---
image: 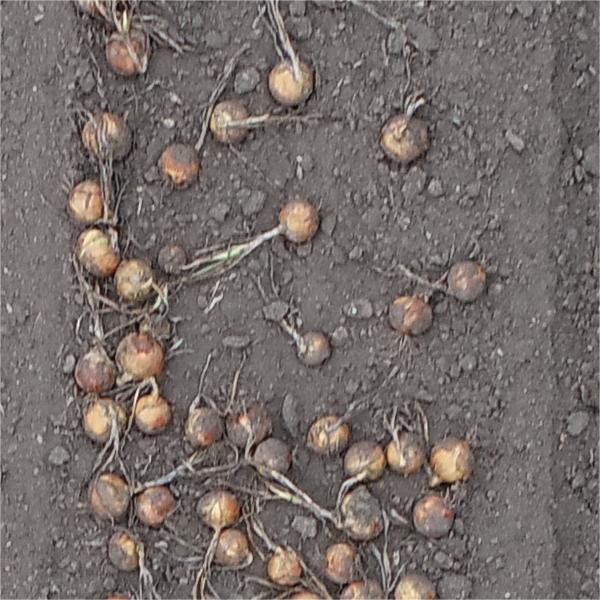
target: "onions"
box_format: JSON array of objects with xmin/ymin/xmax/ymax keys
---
[
  {"xmin": 66, "ymin": 182, "xmax": 103, "ymax": 221},
  {"xmin": 135, "ymin": 485, "xmax": 174, "ymax": 525},
  {"xmin": 155, "ymin": 142, "xmax": 199, "ymax": 187},
  {"xmin": 209, "ymin": 99, "xmax": 248, "ymax": 141},
  {"xmin": 335, "ymin": 578, "xmax": 378, "ymax": 599},
  {"xmin": 76, "ymin": 228, "xmax": 119, "ymax": 275},
  {"xmin": 114, "ymin": 258, "xmax": 153, "ymax": 300},
  {"xmin": 116, "ymin": 334, "xmax": 162, "ymax": 378},
  {"xmin": 81, "ymin": 113, "xmax": 127, "ymax": 157},
  {"xmin": 343, "ymin": 441, "xmax": 383, "ymax": 478},
  {"xmin": 156, "ymin": 241, "xmax": 185, "ymax": 270},
  {"xmin": 393, "ymin": 568, "xmax": 435, "ymax": 599},
  {"xmin": 133, "ymin": 391, "xmax": 169, "ymax": 430},
  {"xmin": 389, "ymin": 294, "xmax": 430, "ymax": 333},
  {"xmin": 383, "ymin": 114, "xmax": 428, "ymax": 160},
  {"xmin": 445, "ymin": 260, "xmax": 485, "ymax": 300},
  {"xmin": 264, "ymin": 546, "xmax": 300, "ymax": 582},
  {"xmin": 429, "ymin": 438, "xmax": 471, "ymax": 482},
  {"xmin": 286, "ymin": 578, "xmax": 328, "ymax": 596},
  {"xmin": 409, "ymin": 494, "xmax": 450, "ymax": 535},
  {"xmin": 72, "ymin": 350, "xmax": 115, "ymax": 391},
  {"xmin": 183, "ymin": 404, "xmax": 223, "ymax": 445},
  {"xmin": 307, "ymin": 415, "xmax": 348, "ymax": 453},
  {"xmin": 268, "ymin": 58, "xmax": 313, "ymax": 103},
  {"xmin": 323, "ymin": 541, "xmax": 357, "ymax": 579},
  {"xmin": 214, "ymin": 528, "xmax": 248, "ymax": 564},
  {"xmin": 105, "ymin": 532, "xmax": 140, "ymax": 571},
  {"xmin": 80, "ymin": 402, "xmax": 116, "ymax": 438},
  {"xmin": 90, "ymin": 472, "xmax": 130, "ymax": 517},
  {"xmin": 251, "ymin": 436, "xmax": 290, "ymax": 473},
  {"xmin": 338, "ymin": 484, "xmax": 382, "ymax": 537},
  {"xmin": 277, "ymin": 199, "xmax": 317, "ymax": 239},
  {"xmin": 198, "ymin": 488, "xmax": 238, "ymax": 525},
  {"xmin": 105, "ymin": 34, "xmax": 145, "ymax": 73},
  {"xmin": 294, "ymin": 330, "xmax": 328, "ymax": 363},
  {"xmin": 229, "ymin": 403, "xmax": 268, "ymax": 443},
  {"xmin": 387, "ymin": 433, "xmax": 426, "ymax": 473}
]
